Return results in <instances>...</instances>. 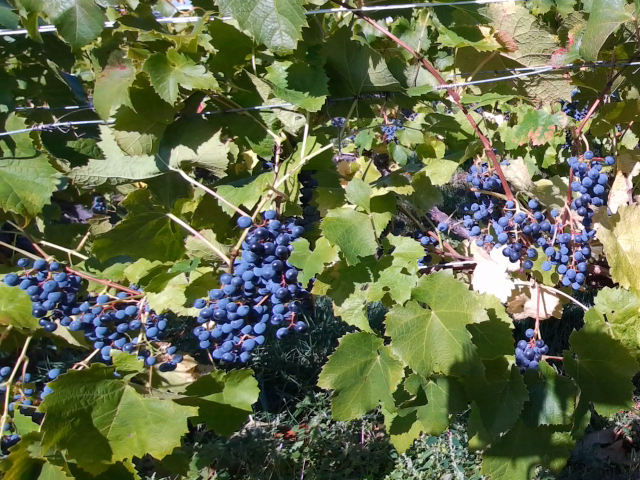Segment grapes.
<instances>
[{"label":"grapes","instance_id":"obj_2","mask_svg":"<svg viewBox=\"0 0 640 480\" xmlns=\"http://www.w3.org/2000/svg\"><path fill=\"white\" fill-rule=\"evenodd\" d=\"M567 165L573 169L575 177H580V181H572L570 185L574 192L581 193L579 198L571 201V208L576 210L578 216H584L581 224L585 226L581 233H576L573 236V241L581 246L580 250L574 252V259L577 261L575 267L578 272L574 269H568L566 264L571 254L568 244L572 240V235L569 232H557L555 234L556 238L553 243L558 245L560 250H555L553 246L547 243V239L541 231H546L553 235L557 231V226L546 220V215L540 212L542 205L535 198H531L528 201V207L535 211L533 218L537 221L531 224H527V214L525 212L517 213L514 216L512 211L514 208L513 201L505 203L508 211L503 216V213L496 207L499 204V200L479 191L473 193L475 199H480L479 202L462 203L460 209L464 212L462 215L463 228L470 237L481 234L479 221L484 225L490 223L491 228L497 235V242L493 244V247L500 249L503 245H506L502 249V255L505 258H509L511 262H516L522 258V253L520 252L522 243L520 241L512 243L510 240H515L517 234L515 232H505L514 229L512 224H508L513 218V222L522 230V235L525 238L532 236V240L542 249L544 255L547 258H551L549 261L542 263L541 269L544 272H548L552 269V265H557L555 271L560 275H564L561 279V285L563 287L571 285L573 290H579L584 285L583 281L588 273L586 261L590 258L591 249L587 242L596 236V231L590 227L593 224L594 211L587 206L590 204L600 206L604 203V198L601 195L606 191L605 185L609 181V175L605 172H600L602 164L597 160H593L591 162L592 168L588 169L586 163H580L577 157L570 156L567 159Z\"/></svg>","mask_w":640,"mask_h":480},{"label":"grapes","instance_id":"obj_7","mask_svg":"<svg viewBox=\"0 0 640 480\" xmlns=\"http://www.w3.org/2000/svg\"><path fill=\"white\" fill-rule=\"evenodd\" d=\"M178 351V347L176 345H172L165 350L167 355L175 354ZM184 361V356L182 354H175L170 358V361H165L159 366V370L161 372L173 371L177 368V364H180Z\"/></svg>","mask_w":640,"mask_h":480},{"label":"grapes","instance_id":"obj_3","mask_svg":"<svg viewBox=\"0 0 640 480\" xmlns=\"http://www.w3.org/2000/svg\"><path fill=\"white\" fill-rule=\"evenodd\" d=\"M31 268L35 275H22L17 272L6 273L4 283L8 287H19L27 291V296L32 302L31 316L40 318L38 325L44 327L46 332H54L58 329L56 322H51L45 317L49 310L50 316L59 319L61 327H68L70 332L83 331V335L94 341L93 347L101 349L98 359L107 362L112 359L110 353L114 346L131 353L139 342L137 337L127 341L123 334L125 331L137 332L142 327L140 319H134V315L141 311L137 304H126L124 309L115 312H104L102 308L109 303L107 295H100L95 299V306L90 308L88 301L77 300V292L82 290L81 277L59 271V266L48 259H35ZM49 272H56L51 281L42 282Z\"/></svg>","mask_w":640,"mask_h":480},{"label":"grapes","instance_id":"obj_11","mask_svg":"<svg viewBox=\"0 0 640 480\" xmlns=\"http://www.w3.org/2000/svg\"><path fill=\"white\" fill-rule=\"evenodd\" d=\"M22 399H23V396H22L21 394H15V395L12 397L13 402H11V403L8 405L7 410H8L9 412H12L14 409H16V408L18 407V403H17V402H18V401H21Z\"/></svg>","mask_w":640,"mask_h":480},{"label":"grapes","instance_id":"obj_9","mask_svg":"<svg viewBox=\"0 0 640 480\" xmlns=\"http://www.w3.org/2000/svg\"><path fill=\"white\" fill-rule=\"evenodd\" d=\"M19 440H20V436L18 434H15V435L7 434L0 441V451L4 455H8L10 453V450L8 449V447H10L13 444L17 443Z\"/></svg>","mask_w":640,"mask_h":480},{"label":"grapes","instance_id":"obj_8","mask_svg":"<svg viewBox=\"0 0 640 480\" xmlns=\"http://www.w3.org/2000/svg\"><path fill=\"white\" fill-rule=\"evenodd\" d=\"M415 235L417 236V239L419 240V244L421 246H427L429 243L432 244L435 248H438L440 246V242L435 237L426 235L421 229H417L415 231Z\"/></svg>","mask_w":640,"mask_h":480},{"label":"grapes","instance_id":"obj_10","mask_svg":"<svg viewBox=\"0 0 640 480\" xmlns=\"http://www.w3.org/2000/svg\"><path fill=\"white\" fill-rule=\"evenodd\" d=\"M137 358L139 360H144L147 365H154L156 363V358L154 356H150V352L148 350H143L137 354Z\"/></svg>","mask_w":640,"mask_h":480},{"label":"grapes","instance_id":"obj_4","mask_svg":"<svg viewBox=\"0 0 640 480\" xmlns=\"http://www.w3.org/2000/svg\"><path fill=\"white\" fill-rule=\"evenodd\" d=\"M548 351L549 346L542 339H537L533 347L529 345L527 340H520L513 350L516 356L514 363L517 365L518 372L524 374L527 368L536 370L540 366L541 355Z\"/></svg>","mask_w":640,"mask_h":480},{"label":"grapes","instance_id":"obj_5","mask_svg":"<svg viewBox=\"0 0 640 480\" xmlns=\"http://www.w3.org/2000/svg\"><path fill=\"white\" fill-rule=\"evenodd\" d=\"M488 169V163L483 161L481 167L478 165H471L469 167V174L466 176L468 183H473L477 189H483L494 193L503 194L505 192L502 181L496 173H492L490 176H481Z\"/></svg>","mask_w":640,"mask_h":480},{"label":"grapes","instance_id":"obj_6","mask_svg":"<svg viewBox=\"0 0 640 480\" xmlns=\"http://www.w3.org/2000/svg\"><path fill=\"white\" fill-rule=\"evenodd\" d=\"M143 312L147 315V320L143 325V331L146 333V338L150 342L159 343L163 336V331L167 328V322L169 315L167 313H161L160 315L156 310H153L148 303L142 305Z\"/></svg>","mask_w":640,"mask_h":480},{"label":"grapes","instance_id":"obj_1","mask_svg":"<svg viewBox=\"0 0 640 480\" xmlns=\"http://www.w3.org/2000/svg\"><path fill=\"white\" fill-rule=\"evenodd\" d=\"M315 168L304 169L297 176L302 181L300 190L302 218L288 216L285 222L276 219L275 210H264L263 220L268 224L256 227L244 239L242 258L234 263V272L219 276L223 288H212L208 292L211 301L196 299L194 308L199 311V324L216 323L209 331L204 325L192 328L198 347L208 349L211 339L216 343L212 349L213 360L246 364L251 360V351L267 342L263 335L270 326L281 325L285 318L299 314L308 291L297 278L299 269L287 262L293 252L297 237L314 228L321 213L308 202L318 182L309 176Z\"/></svg>","mask_w":640,"mask_h":480}]
</instances>
